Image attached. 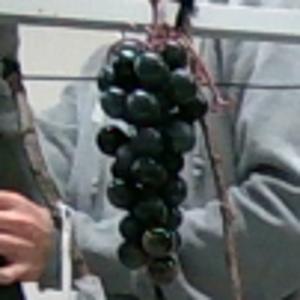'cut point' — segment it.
Segmentation results:
<instances>
[{
    "instance_id": "1",
    "label": "cut point",
    "mask_w": 300,
    "mask_h": 300,
    "mask_svg": "<svg viewBox=\"0 0 300 300\" xmlns=\"http://www.w3.org/2000/svg\"><path fill=\"white\" fill-rule=\"evenodd\" d=\"M147 1L151 9V22L148 26L147 33H146V46L152 48V38L155 30V25L158 19L159 4L162 2V0H147Z\"/></svg>"
}]
</instances>
